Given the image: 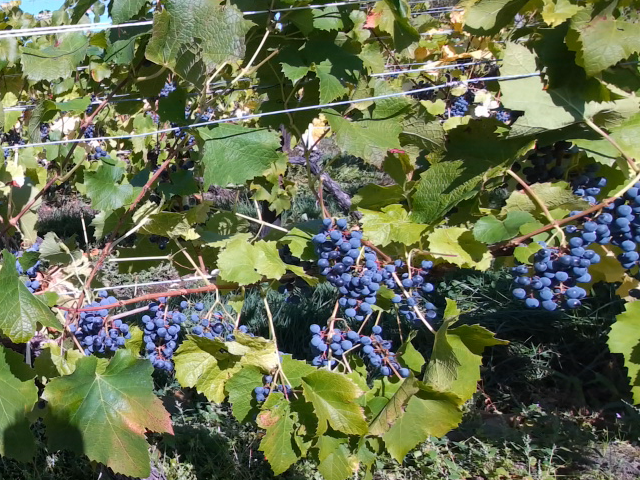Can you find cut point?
Returning a JSON list of instances; mask_svg holds the SVG:
<instances>
[{
	"label": "cut point",
	"instance_id": "cut-point-1",
	"mask_svg": "<svg viewBox=\"0 0 640 480\" xmlns=\"http://www.w3.org/2000/svg\"><path fill=\"white\" fill-rule=\"evenodd\" d=\"M217 303H218V305H219L222 309H225V305H224V304L221 302V300H220L219 289H218V290H216V293H215V300H214V302H213V305H212V306H211V308H210V311H213V310L216 308Z\"/></svg>",
	"mask_w": 640,
	"mask_h": 480
},
{
	"label": "cut point",
	"instance_id": "cut-point-2",
	"mask_svg": "<svg viewBox=\"0 0 640 480\" xmlns=\"http://www.w3.org/2000/svg\"><path fill=\"white\" fill-rule=\"evenodd\" d=\"M365 247H366V246H364V245L362 244V246H361V248H360V250H359V256H358V257L356 258V260H355V265H359V261H360V259H361V256H362V253H363V251H364Z\"/></svg>",
	"mask_w": 640,
	"mask_h": 480
}]
</instances>
